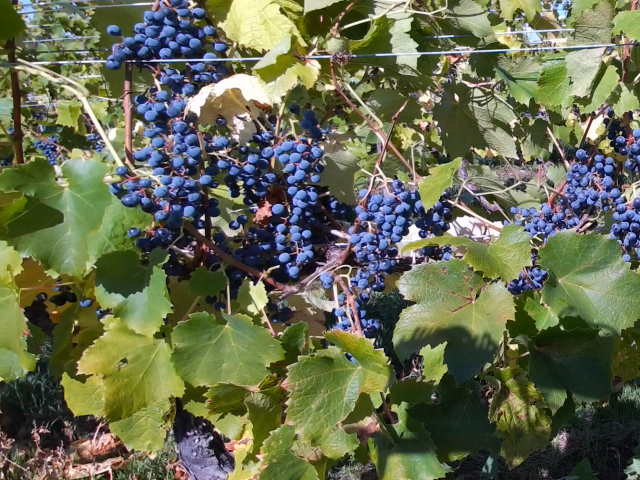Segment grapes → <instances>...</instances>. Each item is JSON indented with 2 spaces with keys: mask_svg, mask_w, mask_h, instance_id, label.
I'll use <instances>...</instances> for the list:
<instances>
[{
  "mask_svg": "<svg viewBox=\"0 0 640 480\" xmlns=\"http://www.w3.org/2000/svg\"><path fill=\"white\" fill-rule=\"evenodd\" d=\"M206 302H207L208 304H214V305H213V309H214L215 311H220V310H221V308H222V309H225V308H226V305H225V303H224L223 301H218V302H217V295H216V294H213V295H212V297H211V296H207V297H206Z\"/></svg>",
  "mask_w": 640,
  "mask_h": 480,
  "instance_id": "obj_16",
  "label": "grapes"
},
{
  "mask_svg": "<svg viewBox=\"0 0 640 480\" xmlns=\"http://www.w3.org/2000/svg\"><path fill=\"white\" fill-rule=\"evenodd\" d=\"M149 94L155 96V103L145 95H137L134 98L136 111L143 115L146 122H154L162 112L169 118H177L187 109L185 99H177L166 91H158L156 87L149 89ZM197 120L195 113H187L185 120L175 121L172 124V153L181 155L186 152V157L170 156L153 147H163L165 139L159 133L167 130L164 122H154L152 128L144 131V136L150 138L153 147H145L134 153L136 162H146L154 170V176L163 186L154 189V196L160 201L154 202L152 198L145 197L139 192V188H149L152 185L150 178L128 180L124 183L127 193L120 198V203L126 208L141 206L145 214H152L155 221L166 220L167 227L155 226L153 233L140 235L138 227H129L127 234L130 238H137V247L145 252H150L158 246L167 250L180 235V229L185 220L192 219V226L196 229H204L206 222L200 218L205 214V194L200 192V187L195 179H186L184 176L171 177V169L177 174L194 176L198 173V165L201 162L202 150L199 146V137L192 130L190 123Z\"/></svg>",
  "mask_w": 640,
  "mask_h": 480,
  "instance_id": "obj_2",
  "label": "grapes"
},
{
  "mask_svg": "<svg viewBox=\"0 0 640 480\" xmlns=\"http://www.w3.org/2000/svg\"><path fill=\"white\" fill-rule=\"evenodd\" d=\"M189 69L194 71L195 82L212 81L219 82L221 76L229 74V68L220 62H195L189 64Z\"/></svg>",
  "mask_w": 640,
  "mask_h": 480,
  "instance_id": "obj_8",
  "label": "grapes"
},
{
  "mask_svg": "<svg viewBox=\"0 0 640 480\" xmlns=\"http://www.w3.org/2000/svg\"><path fill=\"white\" fill-rule=\"evenodd\" d=\"M345 314H346V311L343 306H339L334 310L333 316L335 318H339L340 320L332 325V328L334 330L341 329L343 331H349L352 327H354V323L352 322V325H351L350 319L346 317Z\"/></svg>",
  "mask_w": 640,
  "mask_h": 480,
  "instance_id": "obj_14",
  "label": "grapes"
},
{
  "mask_svg": "<svg viewBox=\"0 0 640 480\" xmlns=\"http://www.w3.org/2000/svg\"><path fill=\"white\" fill-rule=\"evenodd\" d=\"M593 161L595 162L593 166L582 163L571 165L566 177L568 187L565 189V193L567 197L559 196L556 199V204L563 211L553 214V208L547 202H543L540 205V211L536 207L521 209L519 206H512L509 212L512 215L521 214L524 218L532 215L531 223H527L524 230L530 237L542 235V241L547 243L557 233V229L564 231L577 226L581 221L580 213L588 205L602 207L604 212H608L610 206L604 205L602 200L608 197L612 198L616 211L611 214V218L614 222L621 224L613 223L611 225L609 237L616 239L628 248L636 246V258L640 260V197L632 200L633 210L626 208L624 205L626 199L620 196L618 188L612 187L615 169L613 158L611 156L605 157L602 152H597L593 155ZM596 172L600 175L604 174V178L596 180L598 185H603L604 190L597 193L593 188H581L580 185L582 187L590 185V180Z\"/></svg>",
  "mask_w": 640,
  "mask_h": 480,
  "instance_id": "obj_3",
  "label": "grapes"
},
{
  "mask_svg": "<svg viewBox=\"0 0 640 480\" xmlns=\"http://www.w3.org/2000/svg\"><path fill=\"white\" fill-rule=\"evenodd\" d=\"M274 138L272 131H259L253 135V141L261 145V151L250 153L248 146H241L239 153L246 155L242 165H235L230 159H218L216 166H207L204 174L198 178L201 187L217 189L219 181L214 179L218 174V169L228 170V176L224 178V184L228 186L230 196L238 198L240 187L238 181H244L243 204L249 206V212L256 214L258 206L253 203H260L261 197L268 195V186L277 181L275 173H266L262 177V170L270 167L269 159L276 155L278 161L284 164L287 173H294L285 178L287 193L292 196L291 215L288 217L287 225L282 221L285 213V206L282 203H274L271 206V220L265 229H257L255 226L247 228L249 238H263L261 242L253 243L250 247L239 248L234 252V258L251 267H263L265 259L261 256L264 252L275 250L282 252L270 258L272 265H281V271L291 280L299 278L300 267L297 263L309 264L314 258L313 243L336 242L338 234L335 232V225L328 216L323 213V207L327 209L338 221L355 223L357 219L362 222H373L378 226V232L360 231L354 232L355 227L350 225L347 228L349 242L356 245L354 256L363 259L368 265V271L359 269L350 278L351 285L364 289L368 285L372 291L383 292L386 288L385 275H391L397 265L394 258L398 248L389 246L385 237L391 239L393 243H399L400 239L409 235V227L412 220L409 218L414 212L419 214L415 225L420 229L418 236L426 238L432 231L439 234L442 231L448 232L451 225L446 221L452 219V206L447 203L451 197L448 190L442 192V196L435 202L434 207L427 211L424 209L421 196L418 191H405L404 182L394 179L391 182L393 188L392 196L380 194H370L367 197L365 208L360 205L339 203L336 196L318 195L328 192L329 185L306 186L298 189L294 184L305 182L307 175L313 171L322 173V164L312 163L323 156V150L319 147H308V139L299 136L297 142L294 139H287L281 146H270Z\"/></svg>",
  "mask_w": 640,
  "mask_h": 480,
  "instance_id": "obj_1",
  "label": "grapes"
},
{
  "mask_svg": "<svg viewBox=\"0 0 640 480\" xmlns=\"http://www.w3.org/2000/svg\"><path fill=\"white\" fill-rule=\"evenodd\" d=\"M204 147L207 151H216L229 146V139L223 136H217L213 139L210 133L203 135Z\"/></svg>",
  "mask_w": 640,
  "mask_h": 480,
  "instance_id": "obj_13",
  "label": "grapes"
},
{
  "mask_svg": "<svg viewBox=\"0 0 640 480\" xmlns=\"http://www.w3.org/2000/svg\"><path fill=\"white\" fill-rule=\"evenodd\" d=\"M421 254L426 257H430L434 261H449L452 256V247L446 245L443 250L437 246H424L421 249Z\"/></svg>",
  "mask_w": 640,
  "mask_h": 480,
  "instance_id": "obj_12",
  "label": "grapes"
},
{
  "mask_svg": "<svg viewBox=\"0 0 640 480\" xmlns=\"http://www.w3.org/2000/svg\"><path fill=\"white\" fill-rule=\"evenodd\" d=\"M371 300V296L368 292H361L359 298L356 299L355 307L360 317L362 324V335L366 336L371 330H380L383 327V323L379 319L366 318L367 310L362 307L363 303H368Z\"/></svg>",
  "mask_w": 640,
  "mask_h": 480,
  "instance_id": "obj_10",
  "label": "grapes"
},
{
  "mask_svg": "<svg viewBox=\"0 0 640 480\" xmlns=\"http://www.w3.org/2000/svg\"><path fill=\"white\" fill-rule=\"evenodd\" d=\"M162 10H145L142 22L132 27L133 37H125L123 44L114 43L110 55L105 59V67L111 71L122 68V62L134 57L172 58L185 55L193 57H218L214 53H206L202 40L213 36L216 28L213 25H191L188 19L180 17L193 16L201 20L206 17L203 6L189 9L188 0H171L170 7L164 0L159 2Z\"/></svg>",
  "mask_w": 640,
  "mask_h": 480,
  "instance_id": "obj_4",
  "label": "grapes"
},
{
  "mask_svg": "<svg viewBox=\"0 0 640 480\" xmlns=\"http://www.w3.org/2000/svg\"><path fill=\"white\" fill-rule=\"evenodd\" d=\"M318 120L315 118V113L312 110H305L303 112V119L300 121V127L302 129H309V136L314 139H320L322 137V131L318 128Z\"/></svg>",
  "mask_w": 640,
  "mask_h": 480,
  "instance_id": "obj_11",
  "label": "grapes"
},
{
  "mask_svg": "<svg viewBox=\"0 0 640 480\" xmlns=\"http://www.w3.org/2000/svg\"><path fill=\"white\" fill-rule=\"evenodd\" d=\"M204 268L210 273H215L220 270V261L217 255H208L203 258Z\"/></svg>",
  "mask_w": 640,
  "mask_h": 480,
  "instance_id": "obj_15",
  "label": "grapes"
},
{
  "mask_svg": "<svg viewBox=\"0 0 640 480\" xmlns=\"http://www.w3.org/2000/svg\"><path fill=\"white\" fill-rule=\"evenodd\" d=\"M224 274L227 275V277L229 279H231L230 281V294L228 295V289L224 288L223 289V296L225 299H233L236 300L237 299V292L239 290V288L241 287V283L245 278H249L250 281L252 282L253 285H256L257 282L259 281V277L258 276H254L253 273H246L243 270L237 269V268H233L232 265H228L226 267V269L224 270Z\"/></svg>",
  "mask_w": 640,
  "mask_h": 480,
  "instance_id": "obj_9",
  "label": "grapes"
},
{
  "mask_svg": "<svg viewBox=\"0 0 640 480\" xmlns=\"http://www.w3.org/2000/svg\"><path fill=\"white\" fill-rule=\"evenodd\" d=\"M531 264L533 266H527L525 270L529 275L530 280H525V275L522 272L517 274L518 279H512L507 286V290L514 295H519L522 292L535 289H541L543 287V280L548 275V271L546 269H540L539 267H535L538 264V250L533 248L531 250Z\"/></svg>",
  "mask_w": 640,
  "mask_h": 480,
  "instance_id": "obj_6",
  "label": "grapes"
},
{
  "mask_svg": "<svg viewBox=\"0 0 640 480\" xmlns=\"http://www.w3.org/2000/svg\"><path fill=\"white\" fill-rule=\"evenodd\" d=\"M187 77L188 72L186 70H181L178 73L173 68H165L158 73V81L170 86L173 93L193 95L196 92V85L194 83H185Z\"/></svg>",
  "mask_w": 640,
  "mask_h": 480,
  "instance_id": "obj_7",
  "label": "grapes"
},
{
  "mask_svg": "<svg viewBox=\"0 0 640 480\" xmlns=\"http://www.w3.org/2000/svg\"><path fill=\"white\" fill-rule=\"evenodd\" d=\"M609 131L607 138L612 140L610 142V146L622 157H627L629 155L632 160L625 161V168L630 170L633 174H638L640 168V128H635L633 130V136L636 138V141L635 143H631L629 148L627 146V128L621 127L618 119H613L611 121Z\"/></svg>",
  "mask_w": 640,
  "mask_h": 480,
  "instance_id": "obj_5",
  "label": "grapes"
}]
</instances>
